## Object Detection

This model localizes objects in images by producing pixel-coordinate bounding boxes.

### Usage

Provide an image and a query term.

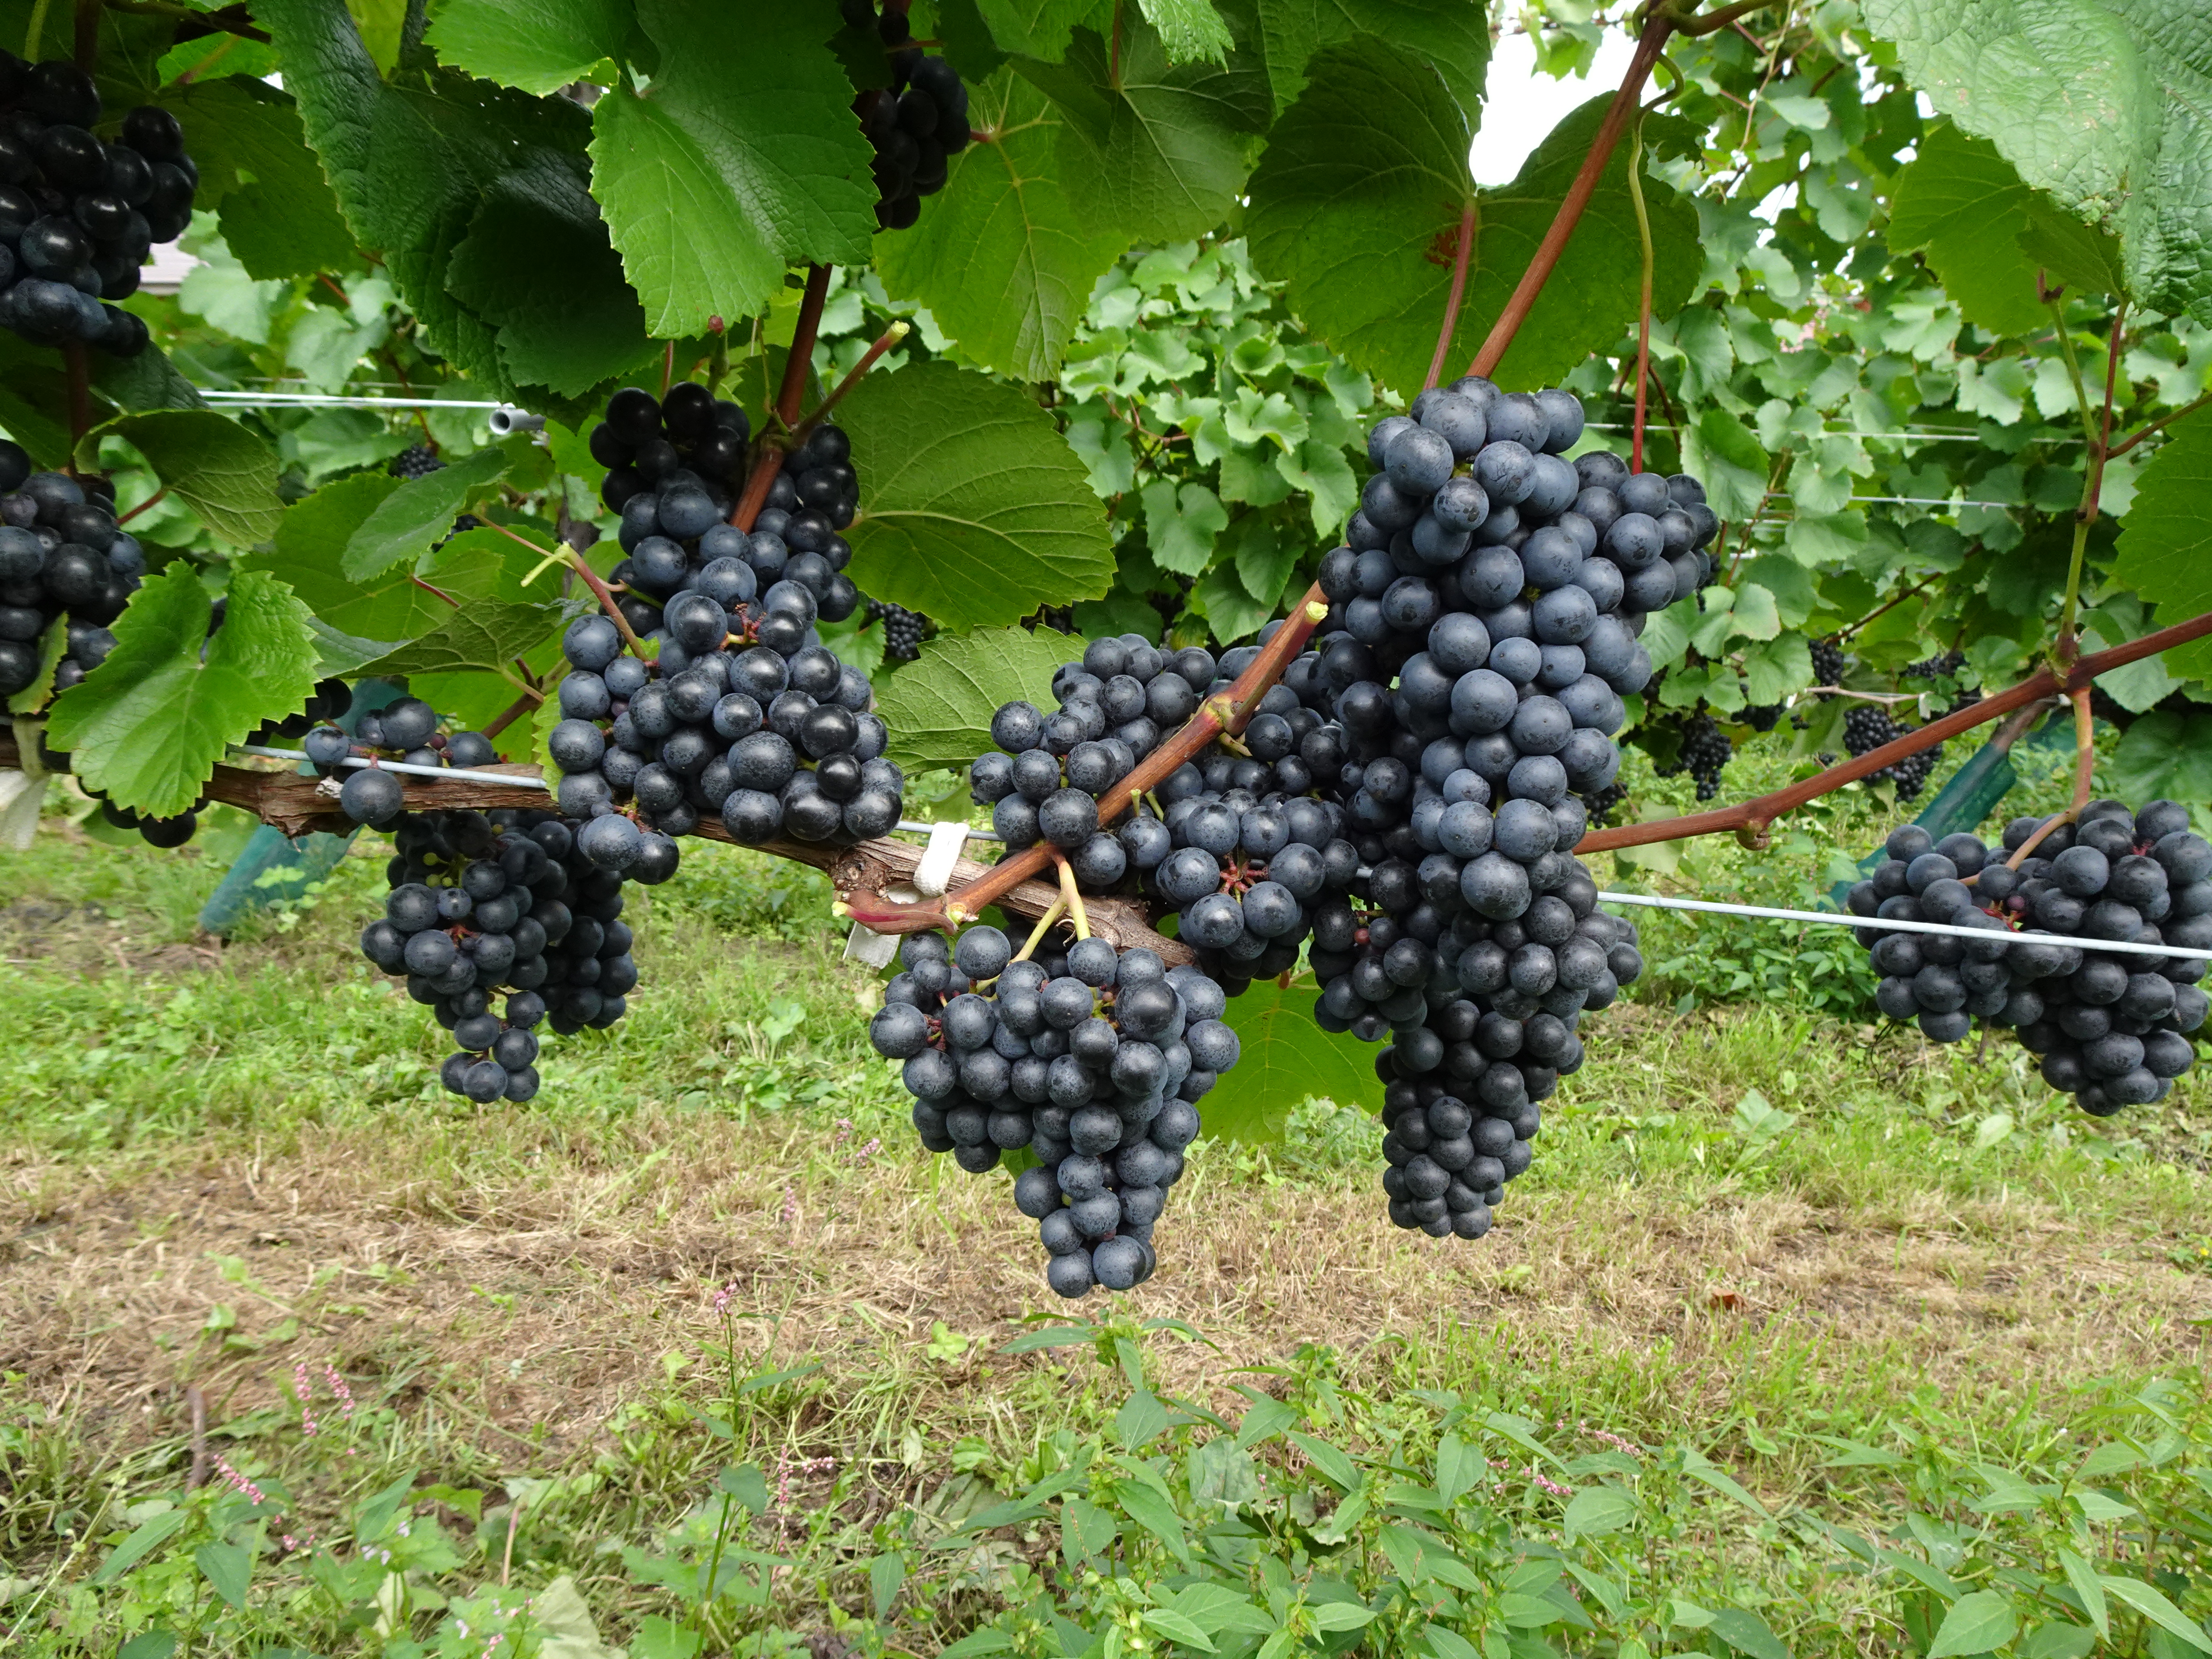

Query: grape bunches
[970,633,1217,884]
[870,924,1241,1297]
[602,467,837,637]
[868,9,971,230]
[588,382,751,515]
[549,612,701,884]
[1155,792,1329,999]
[1315,509,1651,920]
[2004,796,2212,1116]
[361,809,573,1101]
[783,424,859,622]
[305,675,499,833]
[1310,860,1642,1239]
[207,598,230,638]
[1360,377,1584,563]
[2,439,154,746]
[0,49,200,356]
[1559,451,1718,611]
[243,676,353,747]
[1197,617,1346,799]
[1849,825,2065,1042]
[484,806,666,1034]
[38,729,210,847]
[630,558,903,843]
